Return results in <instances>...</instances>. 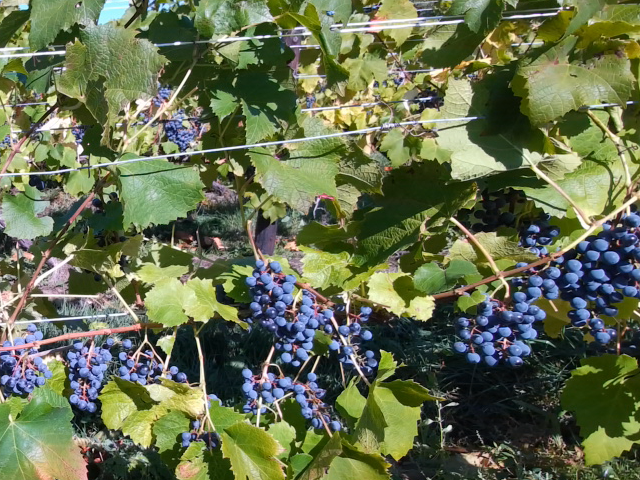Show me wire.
Instances as JSON below:
<instances>
[{
	"label": "wire",
	"mask_w": 640,
	"mask_h": 480,
	"mask_svg": "<svg viewBox=\"0 0 640 480\" xmlns=\"http://www.w3.org/2000/svg\"><path fill=\"white\" fill-rule=\"evenodd\" d=\"M484 115H471L467 117H452V118H440L433 117L432 120H419V121H404V122H390L384 123L381 127H370L366 129H354L350 131H342V132H332L328 134L321 135H308L300 138H292L282 141H266L262 143H253V144H236L234 146L229 147H217L213 149H202V150H193L187 151L185 153H173L168 155H153L150 157L139 158L135 160H118L109 163H93L91 165L86 166H76L71 168H64L59 170H46V171H16V170H6L0 172V178L5 176L13 175V176H48V175H61L66 173H73L78 171H88L93 170L95 168H111L121 165H137L147 162H152L155 160H170L175 158H187L189 156L195 155H205V154H216L221 152H232L238 149H255V148H264L268 146H284L295 143L308 142L310 140H323L330 139L334 137H345L352 136L357 134H368L372 132H383L384 129L392 128V127H406V126H421V125H444L446 123H454V122H469L474 120H484Z\"/></svg>",
	"instance_id": "1"
},
{
	"label": "wire",
	"mask_w": 640,
	"mask_h": 480,
	"mask_svg": "<svg viewBox=\"0 0 640 480\" xmlns=\"http://www.w3.org/2000/svg\"><path fill=\"white\" fill-rule=\"evenodd\" d=\"M461 13H455L451 15H439V16H425V17H407L396 19H383V20H359V21H346V22H334V27H347V26H361V25H379L376 27H363V28H348L340 29V34L351 33H365V32H378L382 30H394L400 28H429L445 25L465 24V19L461 18Z\"/></svg>",
	"instance_id": "2"
},
{
	"label": "wire",
	"mask_w": 640,
	"mask_h": 480,
	"mask_svg": "<svg viewBox=\"0 0 640 480\" xmlns=\"http://www.w3.org/2000/svg\"><path fill=\"white\" fill-rule=\"evenodd\" d=\"M295 30H305V31H289L281 34H271V35H256V36H232L227 38H210V39H202V40H189V41H177V42H162L156 43L153 45L154 49L164 48V47H179V46H191V45H204V44H212V43H229L234 41H258V40H273V39H283L291 36H309L312 37L313 33L309 30L307 25H295Z\"/></svg>",
	"instance_id": "3"
},
{
	"label": "wire",
	"mask_w": 640,
	"mask_h": 480,
	"mask_svg": "<svg viewBox=\"0 0 640 480\" xmlns=\"http://www.w3.org/2000/svg\"><path fill=\"white\" fill-rule=\"evenodd\" d=\"M569 6L546 7V6H528L522 8L504 9V14L525 13L519 15H502V20H522L527 18H539L543 16L557 17L560 11H569Z\"/></svg>",
	"instance_id": "4"
},
{
	"label": "wire",
	"mask_w": 640,
	"mask_h": 480,
	"mask_svg": "<svg viewBox=\"0 0 640 480\" xmlns=\"http://www.w3.org/2000/svg\"><path fill=\"white\" fill-rule=\"evenodd\" d=\"M131 315L130 311L122 313H93L88 315H72L69 317H46L40 319L16 320L15 325L43 324L49 322H71L75 320H90L96 318H124Z\"/></svg>",
	"instance_id": "5"
},
{
	"label": "wire",
	"mask_w": 640,
	"mask_h": 480,
	"mask_svg": "<svg viewBox=\"0 0 640 480\" xmlns=\"http://www.w3.org/2000/svg\"><path fill=\"white\" fill-rule=\"evenodd\" d=\"M46 48L49 50L55 51H41V52H33V53H25V54H2L0 53V59H27V58H35V57H44V56H58V55H66L65 44L51 45L47 44Z\"/></svg>",
	"instance_id": "6"
},
{
	"label": "wire",
	"mask_w": 640,
	"mask_h": 480,
	"mask_svg": "<svg viewBox=\"0 0 640 480\" xmlns=\"http://www.w3.org/2000/svg\"><path fill=\"white\" fill-rule=\"evenodd\" d=\"M619 105L618 101L614 102H603V103H595V104H586L580 107L581 111H585L588 109H597V108H605V107H617Z\"/></svg>",
	"instance_id": "7"
}]
</instances>
